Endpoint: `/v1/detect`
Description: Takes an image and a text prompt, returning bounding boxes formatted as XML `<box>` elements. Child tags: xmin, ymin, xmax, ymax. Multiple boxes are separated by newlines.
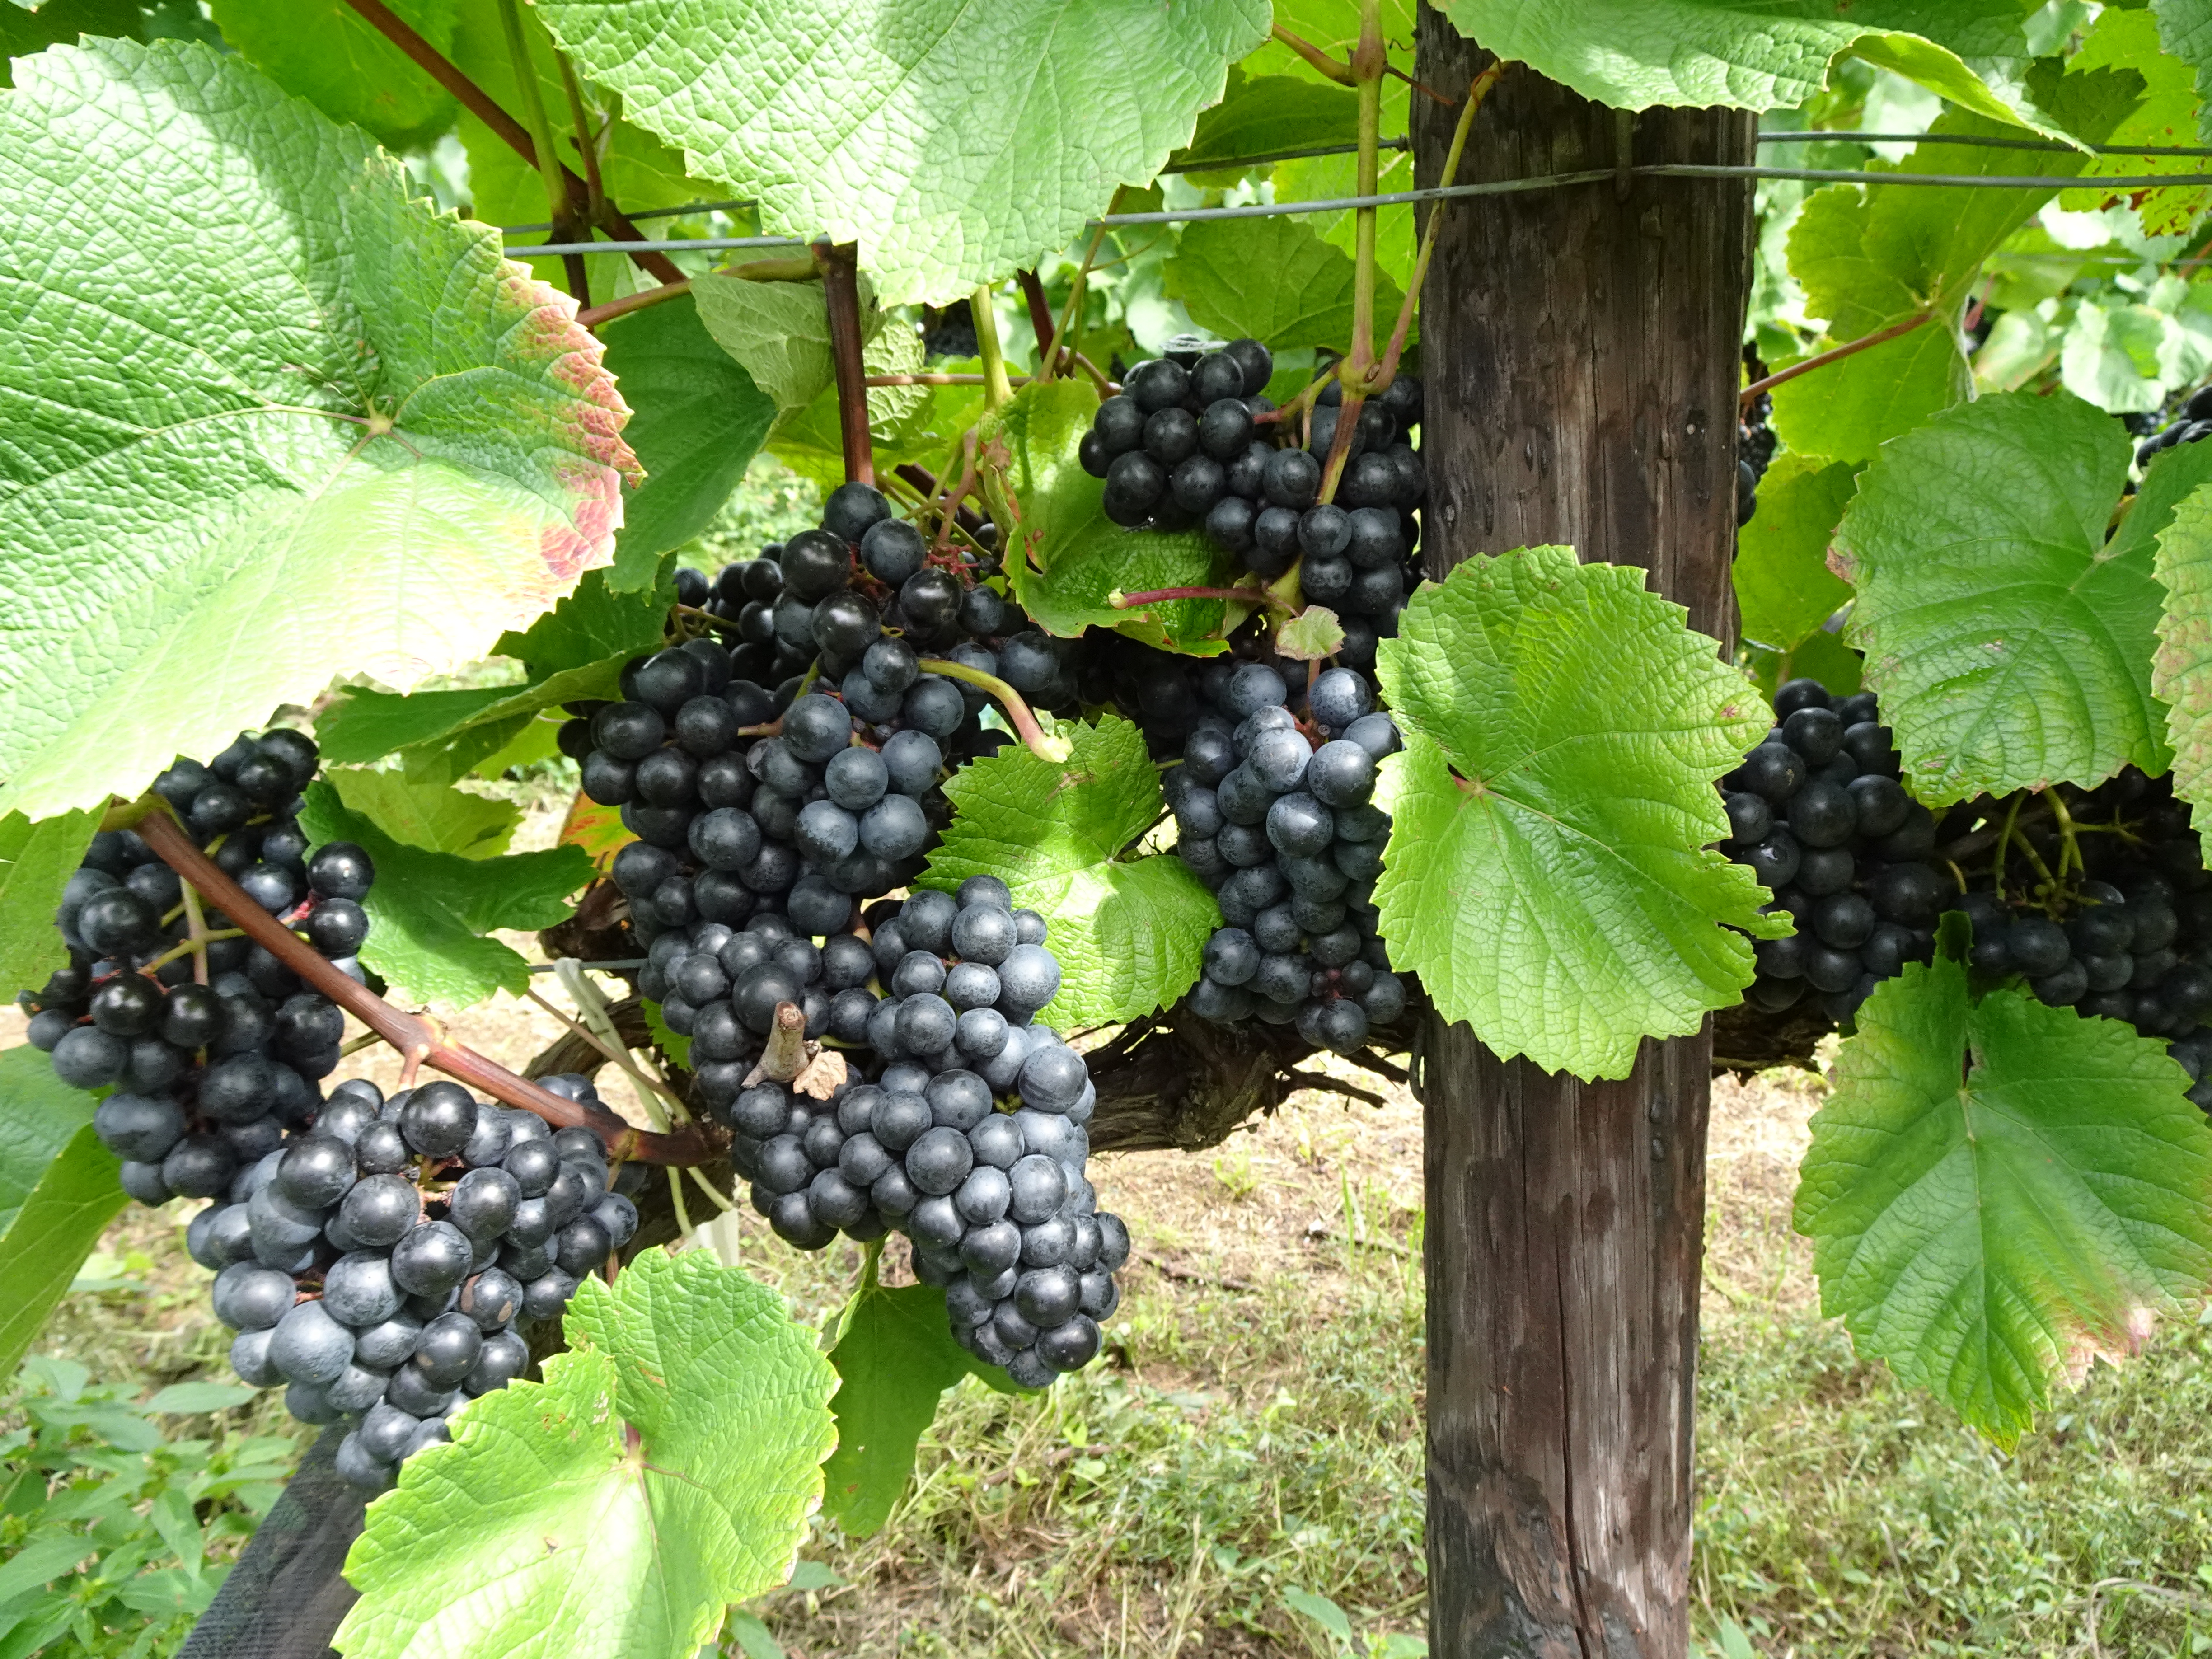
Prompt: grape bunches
<box><xmin>1951</xmin><ymin>876</ymin><xmax>2212</xmax><ymax>1125</ymax></box>
<box><xmin>1214</xmin><ymin>342</ymin><xmax>1424</xmax><ymax>680</ymax></box>
<box><xmin>1078</xmin><ymin>624</ymin><xmax>1259</xmax><ymax>744</ymax></box>
<box><xmin>558</xmin><ymin>637</ymin><xmax>813</xmax><ymax>944</ymax></box>
<box><xmin>187</xmin><ymin>1062</ymin><xmax>647</xmax><ymax>1498</ymax></box>
<box><xmin>1732</xmin><ymin>458</ymin><xmax>1759</xmax><ymax>561</ymax></box>
<box><xmin>637</xmin><ymin>921</ymin><xmax>877</xmax><ymax>1251</ymax></box>
<box><xmin>664</xmin><ymin>546</ymin><xmax>785</xmax><ymax>653</ymax></box>
<box><xmin>1723</xmin><ymin>679</ymin><xmax>1943</xmax><ymax>1031</ymax></box>
<box><xmin>1077</xmin><ymin>332</ymin><xmax>1274</xmax><ymax>556</ymax></box>
<box><xmin>863</xmin><ymin>873</ymin><xmax>1129</xmax><ymax>1386</ymax></box>
<box><xmin>1166</xmin><ymin>663</ymin><xmax>1423</xmax><ymax>1056</ymax></box>
<box><xmin>1973</xmin><ymin>764</ymin><xmax>2204</xmax><ymax>897</ymax></box>
<box><xmin>26</xmin><ymin>730</ymin><xmax>376</xmax><ymax>1207</ymax></box>
<box><xmin>749</xmin><ymin>479</ymin><xmax>1072</xmax><ymax>929</ymax></box>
